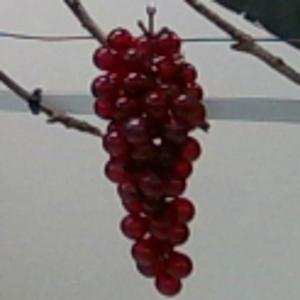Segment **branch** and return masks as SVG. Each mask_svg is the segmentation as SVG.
I'll use <instances>...</instances> for the list:
<instances>
[{
  "mask_svg": "<svg viewBox=\"0 0 300 300\" xmlns=\"http://www.w3.org/2000/svg\"><path fill=\"white\" fill-rule=\"evenodd\" d=\"M182 2L208 20L219 31L226 33L232 40L236 41L228 46L229 50L258 58L274 72L285 77L289 82L295 83L296 86H300V72L291 67L282 57L274 56L273 53L267 51V48L258 45L251 34H246L232 23H229L221 15L208 8L201 0H182Z\"/></svg>",
  "mask_w": 300,
  "mask_h": 300,
  "instance_id": "obj_1",
  "label": "branch"
},
{
  "mask_svg": "<svg viewBox=\"0 0 300 300\" xmlns=\"http://www.w3.org/2000/svg\"><path fill=\"white\" fill-rule=\"evenodd\" d=\"M0 82H2L10 91L16 95L17 99L28 106L29 112L34 116L40 113L47 115L46 125L59 124L64 129L73 130L89 136H96L100 139L105 135L97 126L90 125L88 121L79 120L74 117L65 116L49 108L43 101V90L41 87H35L33 92L29 93L25 88L18 85L9 75L0 69Z\"/></svg>",
  "mask_w": 300,
  "mask_h": 300,
  "instance_id": "obj_2",
  "label": "branch"
},
{
  "mask_svg": "<svg viewBox=\"0 0 300 300\" xmlns=\"http://www.w3.org/2000/svg\"><path fill=\"white\" fill-rule=\"evenodd\" d=\"M71 15L91 37L98 40V44L105 46L107 32L87 12L81 0H62Z\"/></svg>",
  "mask_w": 300,
  "mask_h": 300,
  "instance_id": "obj_3",
  "label": "branch"
},
{
  "mask_svg": "<svg viewBox=\"0 0 300 300\" xmlns=\"http://www.w3.org/2000/svg\"><path fill=\"white\" fill-rule=\"evenodd\" d=\"M211 128H212V124L209 123L208 120H207L206 123L203 126L197 128V129H200L203 133H205V135H208L209 130Z\"/></svg>",
  "mask_w": 300,
  "mask_h": 300,
  "instance_id": "obj_4",
  "label": "branch"
}]
</instances>
